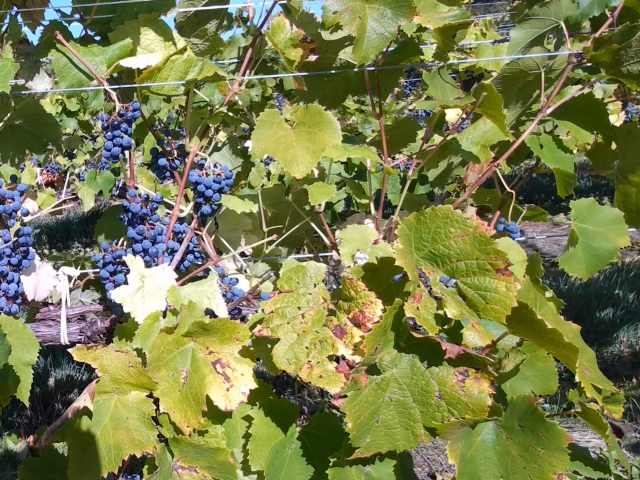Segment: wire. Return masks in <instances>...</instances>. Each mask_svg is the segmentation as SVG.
Masks as SVG:
<instances>
[{"label": "wire", "instance_id": "obj_5", "mask_svg": "<svg viewBox=\"0 0 640 480\" xmlns=\"http://www.w3.org/2000/svg\"><path fill=\"white\" fill-rule=\"evenodd\" d=\"M568 233H555V234H545V235H526L521 236L516 239L517 243L528 241V240H547V239H557V238H568Z\"/></svg>", "mask_w": 640, "mask_h": 480}, {"label": "wire", "instance_id": "obj_4", "mask_svg": "<svg viewBox=\"0 0 640 480\" xmlns=\"http://www.w3.org/2000/svg\"><path fill=\"white\" fill-rule=\"evenodd\" d=\"M185 84H186L185 80H179V81H173V82L158 81V82H152V83H137V84H110L109 88L110 89H139V88H154V87H160V86L175 87V86H182Z\"/></svg>", "mask_w": 640, "mask_h": 480}, {"label": "wire", "instance_id": "obj_3", "mask_svg": "<svg viewBox=\"0 0 640 480\" xmlns=\"http://www.w3.org/2000/svg\"><path fill=\"white\" fill-rule=\"evenodd\" d=\"M335 252H321V253H304V254H292V255H275V256H247V261H277V260H294V259H306V258H324L335 257Z\"/></svg>", "mask_w": 640, "mask_h": 480}, {"label": "wire", "instance_id": "obj_1", "mask_svg": "<svg viewBox=\"0 0 640 480\" xmlns=\"http://www.w3.org/2000/svg\"><path fill=\"white\" fill-rule=\"evenodd\" d=\"M583 50L576 51H560L553 53H538V54H521V55H502L501 57H482L465 60H429L421 62H406L398 65H381L378 67H354L346 69H325L319 71H295L288 73H266L256 76H235V81H258L262 79L273 78L278 80L280 78H291L297 76H322L327 74H349L356 72H380L382 70H400L408 67H424L431 65H467L485 62H505V61H523V60H537L540 58H555L562 56H578L583 55Z\"/></svg>", "mask_w": 640, "mask_h": 480}, {"label": "wire", "instance_id": "obj_2", "mask_svg": "<svg viewBox=\"0 0 640 480\" xmlns=\"http://www.w3.org/2000/svg\"><path fill=\"white\" fill-rule=\"evenodd\" d=\"M104 85L97 86H83V87H72V88H61L56 90H13L11 92L12 96L16 95H38V96H48V95H58L63 93H74V92H86V91H100L104 90Z\"/></svg>", "mask_w": 640, "mask_h": 480}]
</instances>
